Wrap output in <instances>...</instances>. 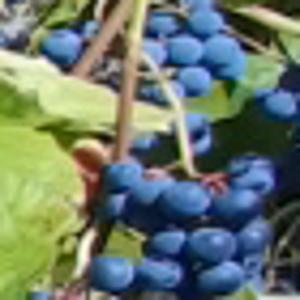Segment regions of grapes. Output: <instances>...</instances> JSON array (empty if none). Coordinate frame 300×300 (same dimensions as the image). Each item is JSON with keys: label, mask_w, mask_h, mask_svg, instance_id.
Here are the masks:
<instances>
[{"label": "grapes", "mask_w": 300, "mask_h": 300, "mask_svg": "<svg viewBox=\"0 0 300 300\" xmlns=\"http://www.w3.org/2000/svg\"><path fill=\"white\" fill-rule=\"evenodd\" d=\"M156 133L138 136L124 162L102 165L92 183L97 214L144 236L137 265L96 256L87 268L102 294L175 293L180 300L236 294L261 273L258 254L274 245L264 201L282 185V167L260 150L235 153L225 173L201 174L145 166L159 149Z\"/></svg>", "instance_id": "01657485"}, {"label": "grapes", "mask_w": 300, "mask_h": 300, "mask_svg": "<svg viewBox=\"0 0 300 300\" xmlns=\"http://www.w3.org/2000/svg\"><path fill=\"white\" fill-rule=\"evenodd\" d=\"M177 13L155 12L141 47L184 99L204 95L218 81H233L245 69L239 42L225 32L224 13L214 0H180Z\"/></svg>", "instance_id": "b958b902"}, {"label": "grapes", "mask_w": 300, "mask_h": 300, "mask_svg": "<svg viewBox=\"0 0 300 300\" xmlns=\"http://www.w3.org/2000/svg\"><path fill=\"white\" fill-rule=\"evenodd\" d=\"M101 24L95 18L86 19L76 30L55 28L40 39V52L61 69H70L94 40Z\"/></svg>", "instance_id": "0513c4c2"}, {"label": "grapes", "mask_w": 300, "mask_h": 300, "mask_svg": "<svg viewBox=\"0 0 300 300\" xmlns=\"http://www.w3.org/2000/svg\"><path fill=\"white\" fill-rule=\"evenodd\" d=\"M258 111L276 123H294L300 118V93L293 88L275 86L255 95Z\"/></svg>", "instance_id": "84f90ec7"}, {"label": "grapes", "mask_w": 300, "mask_h": 300, "mask_svg": "<svg viewBox=\"0 0 300 300\" xmlns=\"http://www.w3.org/2000/svg\"><path fill=\"white\" fill-rule=\"evenodd\" d=\"M189 147L194 157L207 156L214 147V124L205 112H192L186 118Z\"/></svg>", "instance_id": "f8a65327"}]
</instances>
